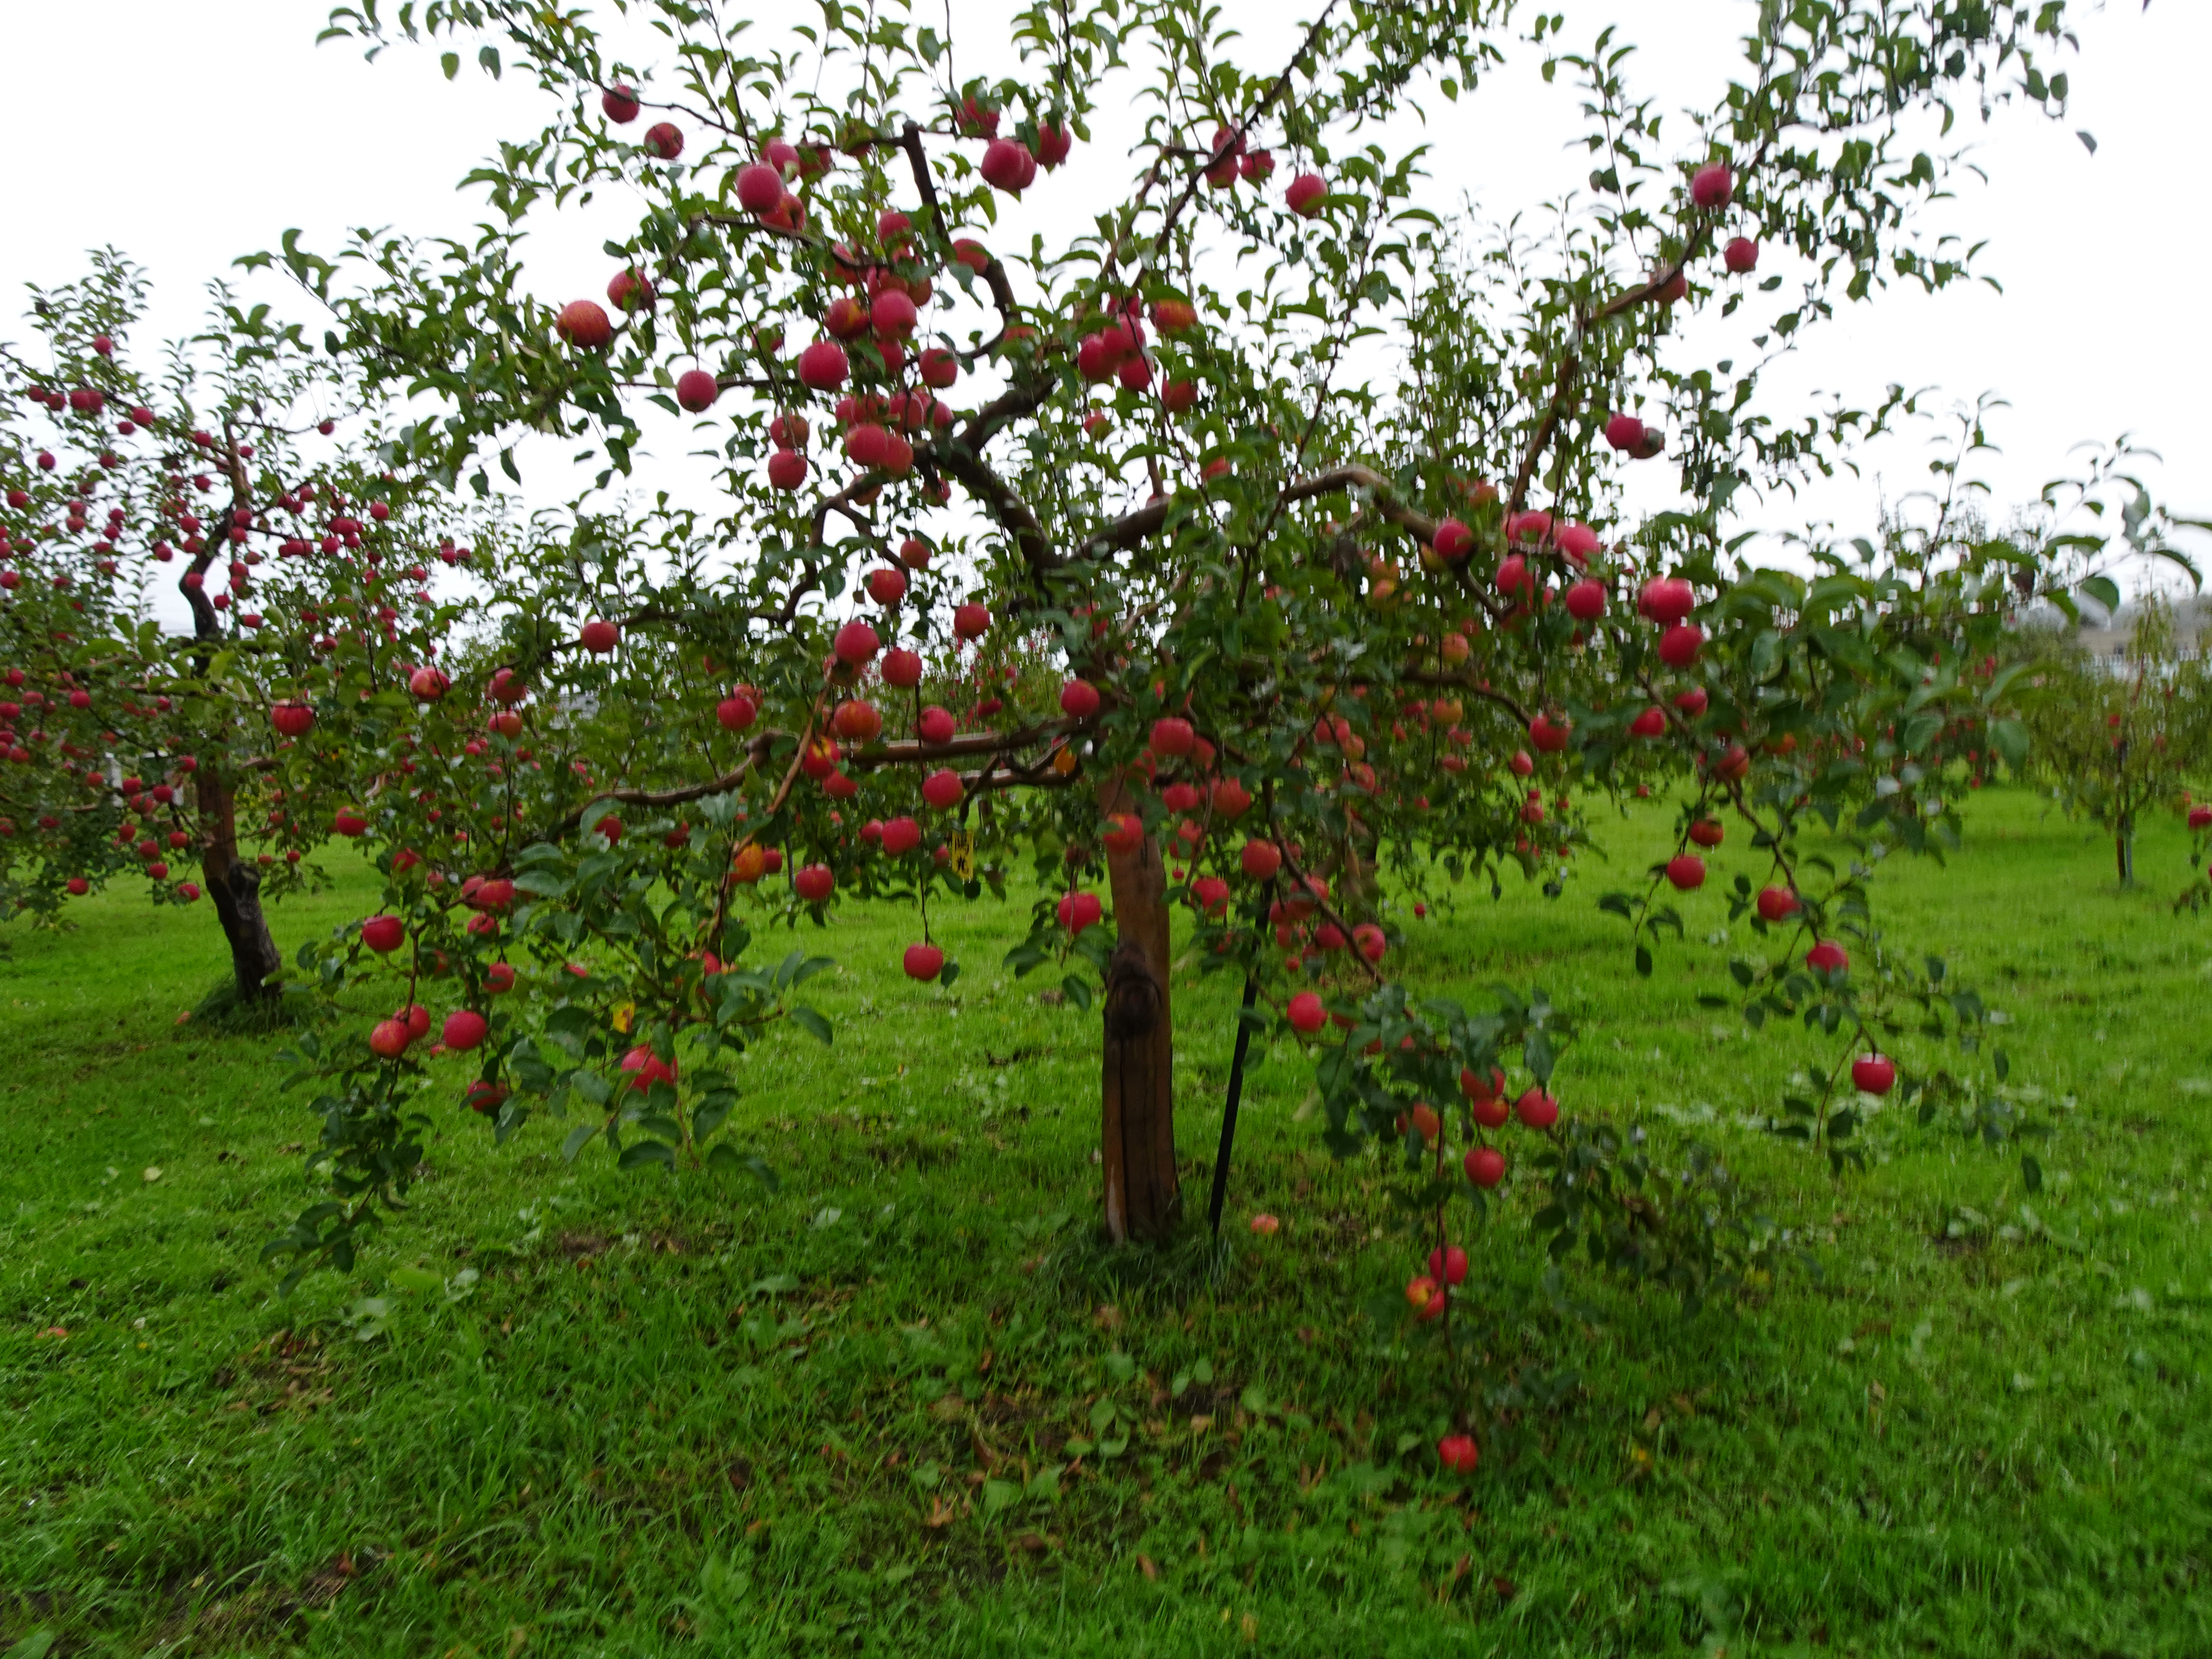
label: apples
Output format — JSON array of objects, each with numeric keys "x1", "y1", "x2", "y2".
[
  {"x1": 272, "y1": 698, "x2": 314, "y2": 736},
  {"x1": 1372, "y1": 559, "x2": 1400, "y2": 583},
  {"x1": 920, "y1": 349, "x2": 958, "y2": 388},
  {"x1": 920, "y1": 478, "x2": 950, "y2": 507},
  {"x1": 915, "y1": 392, "x2": 930, "y2": 407},
  {"x1": 1640, "y1": 575, "x2": 1694, "y2": 624},
  {"x1": 1340, "y1": 760, "x2": 1374, "y2": 794},
  {"x1": 1674, "y1": 684, "x2": 1707, "y2": 719},
  {"x1": 1061, "y1": 679, "x2": 1100, "y2": 717},
  {"x1": 890, "y1": 397, "x2": 922, "y2": 434},
  {"x1": 866, "y1": 569, "x2": 907, "y2": 604},
  {"x1": 954, "y1": 606, "x2": 990, "y2": 637},
  {"x1": 1515, "y1": 514, "x2": 1561, "y2": 551},
  {"x1": 1052, "y1": 733, "x2": 1062, "y2": 749},
  {"x1": 1189, "y1": 737, "x2": 1216, "y2": 777},
  {"x1": 1724, "y1": 238, "x2": 1758, "y2": 272},
  {"x1": 1315, "y1": 922, "x2": 1345, "y2": 949},
  {"x1": 850, "y1": 473, "x2": 881, "y2": 505},
  {"x1": 1717, "y1": 740, "x2": 1749, "y2": 779},
  {"x1": 1286, "y1": 175, "x2": 1328, "y2": 215},
  {"x1": 833, "y1": 701, "x2": 873, "y2": 740},
  {"x1": 867, "y1": 264, "x2": 909, "y2": 298},
  {"x1": 1502, "y1": 517, "x2": 1520, "y2": 540},
  {"x1": 1331, "y1": 1011, "x2": 1353, "y2": 1027},
  {"x1": 767, "y1": 136, "x2": 781, "y2": 148},
  {"x1": 1440, "y1": 632, "x2": 1468, "y2": 662},
  {"x1": 1352, "y1": 1023, "x2": 1381, "y2": 1054},
  {"x1": 754, "y1": 334, "x2": 782, "y2": 352},
  {"x1": 1103, "y1": 812, "x2": 1143, "y2": 854},
  {"x1": 1161, "y1": 378, "x2": 1197, "y2": 412},
  {"x1": 881, "y1": 651, "x2": 921, "y2": 686},
  {"x1": 1606, "y1": 418, "x2": 1643, "y2": 449},
  {"x1": 602, "y1": 86, "x2": 639, "y2": 123},
  {"x1": 1401, "y1": 1034, "x2": 1424, "y2": 1058},
  {"x1": 1277, "y1": 925, "x2": 1301, "y2": 948},
  {"x1": 483, "y1": 961, "x2": 515, "y2": 993},
  {"x1": 1396, "y1": 1103, "x2": 1440, "y2": 1139},
  {"x1": 428, "y1": 872, "x2": 443, "y2": 889},
  {"x1": 836, "y1": 626, "x2": 877, "y2": 664},
  {"x1": 762, "y1": 144, "x2": 799, "y2": 183},
  {"x1": 916, "y1": 708, "x2": 954, "y2": 744},
  {"x1": 836, "y1": 399, "x2": 856, "y2": 427},
  {"x1": 1508, "y1": 554, "x2": 1525, "y2": 563},
  {"x1": 814, "y1": 710, "x2": 839, "y2": 734},
  {"x1": 1468, "y1": 485, "x2": 1498, "y2": 506},
  {"x1": 728, "y1": 686, "x2": 763, "y2": 713},
  {"x1": 718, "y1": 698, "x2": 755, "y2": 730},
  {"x1": 988, "y1": 662, "x2": 1016, "y2": 685},
  {"x1": 431, "y1": 949, "x2": 451, "y2": 975},
  {"x1": 391, "y1": 848, "x2": 418, "y2": 873},
  {"x1": 1472, "y1": 1093, "x2": 1509, "y2": 1128},
  {"x1": 934, "y1": 844, "x2": 948, "y2": 863},
  {"x1": 1517, "y1": 1086, "x2": 1557, "y2": 1128},
  {"x1": 952, "y1": 238, "x2": 988, "y2": 276},
  {"x1": 1650, "y1": 272, "x2": 1685, "y2": 302},
  {"x1": 923, "y1": 401, "x2": 953, "y2": 427},
  {"x1": 489, "y1": 712, "x2": 523, "y2": 740},
  {"x1": 674, "y1": 949, "x2": 720, "y2": 1004},
  {"x1": 664, "y1": 819, "x2": 690, "y2": 849},
  {"x1": 607, "y1": 268, "x2": 652, "y2": 311},
  {"x1": 1077, "y1": 338, "x2": 1117, "y2": 380},
  {"x1": 1627, "y1": 427, "x2": 1664, "y2": 458},
  {"x1": 982, "y1": 142, "x2": 1024, "y2": 189},
  {"x1": 1762, "y1": 733, "x2": 1797, "y2": 754},
  {"x1": 770, "y1": 415, "x2": 810, "y2": 449},
  {"x1": 823, "y1": 243, "x2": 866, "y2": 284},
  {"x1": 824, "y1": 654, "x2": 862, "y2": 686},
  {"x1": 848, "y1": 143, "x2": 869, "y2": 155},
  {"x1": 1693, "y1": 168, "x2": 1732, "y2": 207},
  {"x1": 826, "y1": 299, "x2": 869, "y2": 338},
  {"x1": 1526, "y1": 576, "x2": 1554, "y2": 610},
  {"x1": 881, "y1": 817, "x2": 920, "y2": 856},
  {"x1": 1460, "y1": 1063, "x2": 1505, "y2": 1097},
  {"x1": 1714, "y1": 718, "x2": 1749, "y2": 741},
  {"x1": 1571, "y1": 621, "x2": 1596, "y2": 646},
  {"x1": 1205, "y1": 154, "x2": 1238, "y2": 190},
  {"x1": 846, "y1": 425, "x2": 887, "y2": 466},
  {"x1": 822, "y1": 774, "x2": 857, "y2": 799},
  {"x1": 1285, "y1": 840, "x2": 1301, "y2": 860},
  {"x1": 1127, "y1": 748, "x2": 1156, "y2": 787},
  {"x1": 1372, "y1": 579, "x2": 1396, "y2": 600},
  {"x1": 1291, "y1": 875, "x2": 1329, "y2": 913},
  {"x1": 1155, "y1": 677, "x2": 1192, "y2": 709},
  {"x1": 1002, "y1": 325, "x2": 1038, "y2": 361},
  {"x1": 1269, "y1": 899, "x2": 1293, "y2": 925},
  {"x1": 892, "y1": 246, "x2": 925, "y2": 270},
  {"x1": 1316, "y1": 714, "x2": 1350, "y2": 745},
  {"x1": 1265, "y1": 583, "x2": 1295, "y2": 600},
  {"x1": 1302, "y1": 941, "x2": 1321, "y2": 960},
  {"x1": 907, "y1": 277, "x2": 932, "y2": 306},
  {"x1": 1851, "y1": 1052, "x2": 1894, "y2": 1095},
  {"x1": 1190, "y1": 877, "x2": 1229, "y2": 915},
  {"x1": 1102, "y1": 319, "x2": 1145, "y2": 360},
  {"x1": 370, "y1": 1019, "x2": 410, "y2": 1059},
  {"x1": 1066, "y1": 843, "x2": 1090, "y2": 866},
  {"x1": 469, "y1": 1078, "x2": 507, "y2": 1112},
  {"x1": 1214, "y1": 933, "x2": 1233, "y2": 952},
  {"x1": 461, "y1": 875, "x2": 485, "y2": 910},
  {"x1": 1659, "y1": 626, "x2": 1705, "y2": 668},
  {"x1": 411, "y1": 668, "x2": 450, "y2": 700},
  {"x1": 1241, "y1": 147, "x2": 1275, "y2": 179},
  {"x1": 880, "y1": 436, "x2": 913, "y2": 478},
  {"x1": 1286, "y1": 896, "x2": 1310, "y2": 921},
  {"x1": 1200, "y1": 457, "x2": 1230, "y2": 480},
  {"x1": 1351, "y1": 923, "x2": 1385, "y2": 962},
  {"x1": 1629, "y1": 705, "x2": 1665, "y2": 736},
  {"x1": 1429, "y1": 1246, "x2": 1468, "y2": 1284},
  {"x1": 1150, "y1": 717, "x2": 1193, "y2": 755},
  {"x1": 1567, "y1": 584, "x2": 1603, "y2": 619},
  {"x1": 878, "y1": 213, "x2": 911, "y2": 249},
  {"x1": 644, "y1": 122, "x2": 684, "y2": 159},
  {"x1": 1339, "y1": 733, "x2": 1365, "y2": 761},
  {"x1": 622, "y1": 1046, "x2": 677, "y2": 1095},
  {"x1": 1287, "y1": 991, "x2": 1328, "y2": 1033},
  {"x1": 977, "y1": 696, "x2": 1003, "y2": 721},
  {"x1": 442, "y1": 1011, "x2": 486, "y2": 1050},
  {"x1": 1162, "y1": 783, "x2": 1199, "y2": 812},
  {"x1": 705, "y1": 654, "x2": 726, "y2": 676},
  {"x1": 870, "y1": 289, "x2": 916, "y2": 338},
  {"x1": 1560, "y1": 525, "x2": 1600, "y2": 568},
  {"x1": 1083, "y1": 415, "x2": 1107, "y2": 434},
  {"x1": 795, "y1": 862, "x2": 833, "y2": 900},
  {"x1": 1516, "y1": 838, "x2": 1538, "y2": 856},
  {"x1": 1211, "y1": 771, "x2": 1249, "y2": 818},
  {"x1": 1034, "y1": 125, "x2": 1072, "y2": 165},
  {"x1": 1406, "y1": 1276, "x2": 1445, "y2": 1321},
  {"x1": 957, "y1": 95, "x2": 999, "y2": 138},
  {"x1": 1611, "y1": 411, "x2": 1625, "y2": 422},
  {"x1": 1444, "y1": 758, "x2": 1466, "y2": 772},
  {"x1": 769, "y1": 452, "x2": 807, "y2": 490},
  {"x1": 1438, "y1": 1433, "x2": 1478, "y2": 1472},
  {"x1": 1757, "y1": 887, "x2": 1800, "y2": 920},
  {"x1": 1350, "y1": 785, "x2": 1384, "y2": 823},
  {"x1": 761, "y1": 851, "x2": 782, "y2": 874},
  {"x1": 478, "y1": 880, "x2": 517, "y2": 910},
  {"x1": 581, "y1": 619, "x2": 618, "y2": 653},
  {"x1": 1501, "y1": 605, "x2": 1528, "y2": 631},
  {"x1": 677, "y1": 371, "x2": 718, "y2": 412},
  {"x1": 1447, "y1": 728, "x2": 1472, "y2": 743},
  {"x1": 759, "y1": 193, "x2": 806, "y2": 231},
  {"x1": 1805, "y1": 944, "x2": 1848, "y2": 976},
  {"x1": 1697, "y1": 750, "x2": 1707, "y2": 784},
  {"x1": 798, "y1": 342, "x2": 848, "y2": 391},
  {"x1": 1433, "y1": 697, "x2": 1463, "y2": 727},
  {"x1": 1108, "y1": 293, "x2": 1141, "y2": 318},
  {"x1": 594, "y1": 814, "x2": 622, "y2": 846},
  {"x1": 1168, "y1": 817, "x2": 1207, "y2": 858},
  {"x1": 467, "y1": 915, "x2": 499, "y2": 937},
  {"x1": 1667, "y1": 856, "x2": 1705, "y2": 888},
  {"x1": 1211, "y1": 124, "x2": 1247, "y2": 158},
  {"x1": 922, "y1": 771, "x2": 964, "y2": 810},
  {"x1": 334, "y1": 804, "x2": 368, "y2": 837},
  {"x1": 1154, "y1": 300, "x2": 1197, "y2": 334},
  {"x1": 804, "y1": 737, "x2": 840, "y2": 780},
  {"x1": 1511, "y1": 751, "x2": 1532, "y2": 775},
  {"x1": 1074, "y1": 606, "x2": 1106, "y2": 640},
  {"x1": 1463, "y1": 1146, "x2": 1505, "y2": 1187},
  {"x1": 564, "y1": 964, "x2": 588, "y2": 977},
  {"x1": 363, "y1": 915, "x2": 405, "y2": 954},
  {"x1": 1495, "y1": 561, "x2": 1530, "y2": 599},
  {"x1": 1058, "y1": 893, "x2": 1101, "y2": 935},
  {"x1": 1118, "y1": 354, "x2": 1154, "y2": 389},
  {"x1": 555, "y1": 300, "x2": 610, "y2": 348},
  {"x1": 1001, "y1": 138, "x2": 1034, "y2": 189},
  {"x1": 489, "y1": 669, "x2": 524, "y2": 703},
  {"x1": 1521, "y1": 805, "x2": 1543, "y2": 826},
  {"x1": 904, "y1": 944, "x2": 943, "y2": 981},
  {"x1": 1145, "y1": 493, "x2": 1172, "y2": 509},
  {"x1": 901, "y1": 540, "x2": 931, "y2": 568},
  {"x1": 1689, "y1": 815, "x2": 1724, "y2": 847},
  {"x1": 737, "y1": 165, "x2": 782, "y2": 212},
  {"x1": 859, "y1": 818, "x2": 884, "y2": 845},
  {"x1": 1448, "y1": 474, "x2": 1483, "y2": 493},
  {"x1": 729, "y1": 842, "x2": 763, "y2": 886},
  {"x1": 798, "y1": 143, "x2": 830, "y2": 178},
  {"x1": 866, "y1": 711, "x2": 881, "y2": 741},
  {"x1": 1241, "y1": 838, "x2": 1281, "y2": 880},
  {"x1": 1529, "y1": 719, "x2": 1568, "y2": 751},
  {"x1": 1432, "y1": 524, "x2": 1473, "y2": 562},
  {"x1": 392, "y1": 1004, "x2": 429, "y2": 1039},
  {"x1": 1419, "y1": 542, "x2": 1446, "y2": 571},
  {"x1": 1199, "y1": 783, "x2": 1207, "y2": 808},
  {"x1": 852, "y1": 393, "x2": 883, "y2": 424},
  {"x1": 869, "y1": 334, "x2": 903, "y2": 372}
]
